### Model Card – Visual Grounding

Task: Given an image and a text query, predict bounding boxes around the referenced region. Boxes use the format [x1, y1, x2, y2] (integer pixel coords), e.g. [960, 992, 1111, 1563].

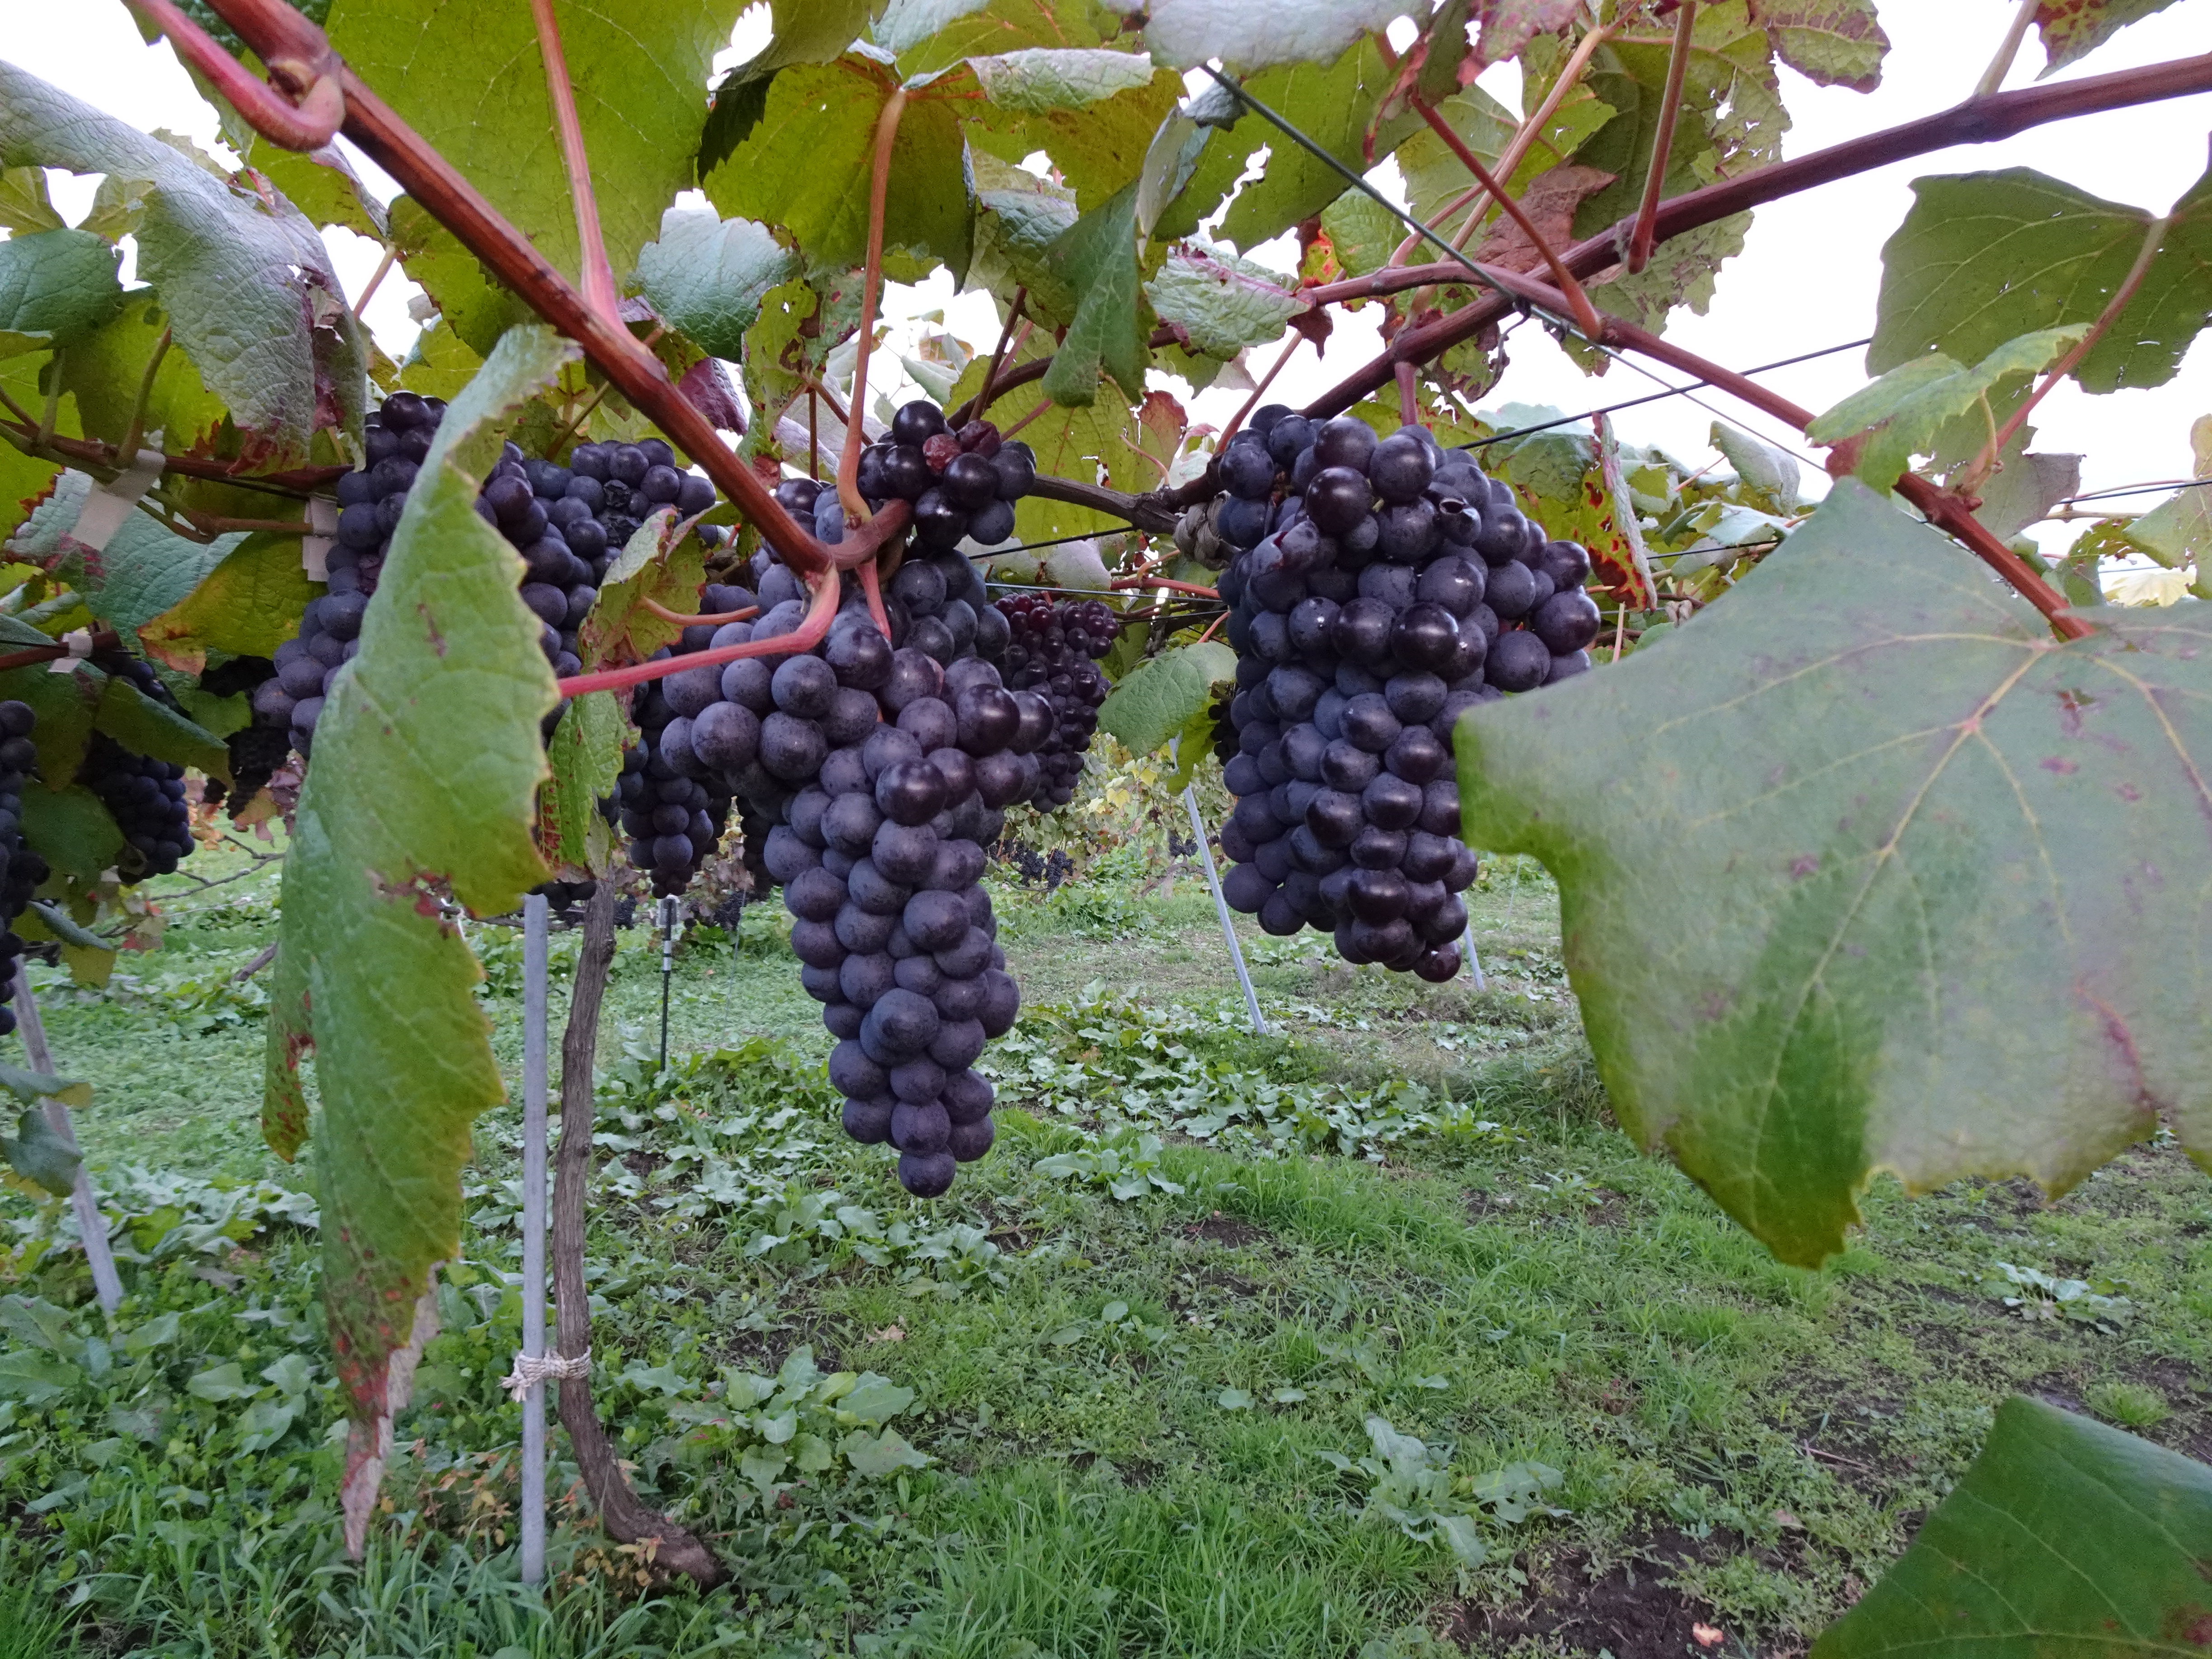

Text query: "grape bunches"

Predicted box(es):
[526, 438, 715, 579]
[222, 722, 291, 835]
[615, 666, 714, 871]
[0, 919, 25, 1037]
[1286, 422, 1596, 985]
[471, 440, 606, 749]
[0, 836, 56, 938]
[526, 711, 646, 906]
[1012, 844, 1044, 887]
[856, 397, 1035, 543]
[252, 392, 448, 760]
[74, 641, 196, 887]
[1043, 847, 1076, 892]
[0, 698, 36, 873]
[1173, 404, 1337, 935]
[990, 590, 1119, 819]
[610, 891, 640, 932]
[657, 476, 1053, 1197]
